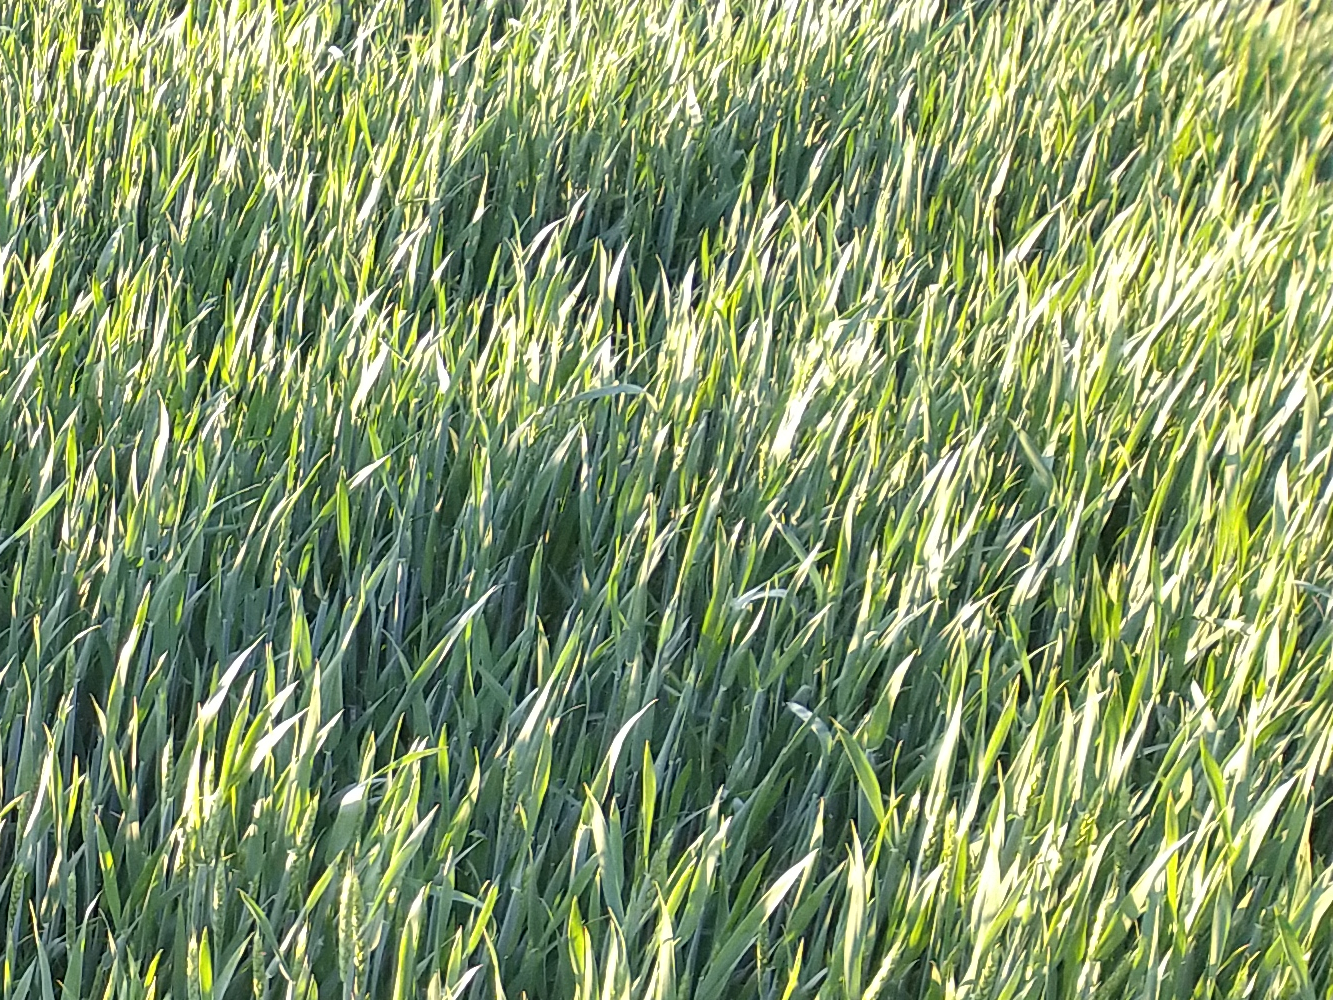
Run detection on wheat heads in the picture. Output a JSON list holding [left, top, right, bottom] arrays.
[[624, 208, 635, 238], [720, 118, 732, 152], [501, 202, 513, 239], [1024, 101, 1042, 162], [1109, 116, 1124, 157], [14, 796, 31, 839], [186, 936, 201, 1000], [286, 799, 318, 894], [881, 445, 898, 478], [965, 947, 1001, 1000], [200, 790, 224, 859], [803, 590, 813, 609], [279, 254, 290, 283], [551, 417, 568, 453], [177, 841, 189, 877], [352, 883, 367, 991], [675, 973, 693, 1000], [984, 366, 1017, 445], [407, 403, 415, 441], [900, 441, 917, 486], [160, 348, 176, 388], [80, 778, 92, 841], [569, 127, 578, 168], [161, 738, 176, 798], [560, 306, 571, 345], [80, 533, 93, 565], [632, 199, 646, 238], [1211, 974, 1246, 1000], [540, 156, 551, 191], [65, 646, 76, 695], [1115, 784, 1130, 875], [339, 867, 355, 977], [275, 501, 294, 570], [847, 952, 898, 1000], [1086, 980, 1110, 1000], [1136, 92, 1146, 131], [943, 817, 957, 887], [919, 806, 943, 876], [440, 170, 451, 203], [180, 215, 191, 245], [1299, 540, 1310, 568], [501, 749, 517, 827], [1123, 113, 1136, 144], [591, 48, 604, 82], [0, 478, 7, 523], [26, 523, 41, 591], [631, 424, 652, 480], [672, 428, 688, 471], [796, 349, 821, 396], [894, 790, 922, 863], [321, 417, 335, 444], [1058, 820, 1079, 873], [595, 66, 608, 91], [1077, 957, 1130, 1000], [65, 871, 77, 947], [7, 863, 26, 931], [1017, 762, 1042, 820], [1158, 325, 1193, 372], [1092, 484, 1108, 529], [643, 830, 673, 915], [1282, 974, 1300, 1000], [758, 438, 768, 490], [303, 353, 315, 409], [430, 124, 445, 184], [523, 440, 539, 480], [88, 966, 103, 1000], [30, 770, 40, 809], [1077, 788, 1102, 851], [144, 355, 162, 419], [758, 918, 769, 975], [673, 202, 680, 232], [39, 682, 48, 719], [609, 665, 632, 735], [1295, 311, 1316, 362], [594, 137, 610, 191], [252, 932, 267, 1000], [929, 327, 942, 376], [110, 589, 125, 647], [211, 862, 224, 944]]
